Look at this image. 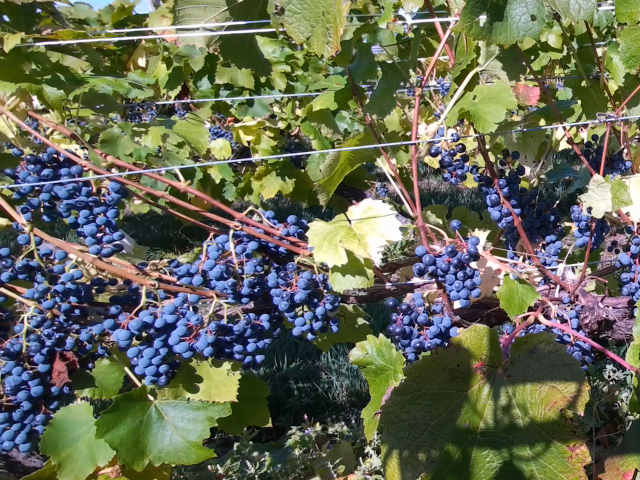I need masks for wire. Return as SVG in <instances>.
Masks as SVG:
<instances>
[{"instance_id":"obj_1","label":"wire","mask_w":640,"mask_h":480,"mask_svg":"<svg viewBox=\"0 0 640 480\" xmlns=\"http://www.w3.org/2000/svg\"><path fill=\"white\" fill-rule=\"evenodd\" d=\"M451 140L450 136L439 137V138H430V139H419V140H400V141H392L388 143L381 144H366V145H357V146H346L340 147L338 149H314L310 151H293L286 153H266V154H258V155H250L244 157L231 158L229 160H214V161H202V162H190V163H180V164H171L164 167L158 168H147V169H138L132 171H118L111 172L107 174H96V175H83L80 177H68V178H58L47 181H28L21 183H10V184H0V189H12V188H23V187H31V186H49L60 183H70V182H83L86 180H99V179H109L120 176H134L141 174H149V173H160L166 172L174 169H182V168H192V167H204V166H216V165H231L233 163L239 162H247L252 160H261L268 158H288L295 156H313L317 154H340L342 152L349 151H359V150H368V149H383L390 148L394 146H403V145H418V144H432V143H442L449 142Z\"/></svg>"},{"instance_id":"obj_2","label":"wire","mask_w":640,"mask_h":480,"mask_svg":"<svg viewBox=\"0 0 640 480\" xmlns=\"http://www.w3.org/2000/svg\"><path fill=\"white\" fill-rule=\"evenodd\" d=\"M277 31L276 27L272 28H249L243 30H229L220 32H206L199 31L193 33H176V34H162L156 36H120L113 38H89V39H77V40H37L33 42L18 43V48L35 47L39 45H79V44H91V43H115L122 41H159L164 39H178V38H195V37H222L231 35H246L252 33H274Z\"/></svg>"},{"instance_id":"obj_3","label":"wire","mask_w":640,"mask_h":480,"mask_svg":"<svg viewBox=\"0 0 640 480\" xmlns=\"http://www.w3.org/2000/svg\"><path fill=\"white\" fill-rule=\"evenodd\" d=\"M639 119H640L639 115H620V116H612V117H603V118L587 120V121H568L563 124H547V125H540V126L518 127L513 129H498L495 131H487V132H472V133L461 134L460 138L468 139V138H474V137H489V136H497L500 134L512 135L515 133L527 132V131L565 129L573 126H589V125H596V124H601L605 122H614V121H622V120H639Z\"/></svg>"},{"instance_id":"obj_4","label":"wire","mask_w":640,"mask_h":480,"mask_svg":"<svg viewBox=\"0 0 640 480\" xmlns=\"http://www.w3.org/2000/svg\"><path fill=\"white\" fill-rule=\"evenodd\" d=\"M270 19L258 20H227L222 22L201 23L195 25L145 26L135 28H114L109 30H93V35H111L116 33H137L147 31L198 30L203 28L224 27L230 25H261L269 24Z\"/></svg>"},{"instance_id":"obj_5","label":"wire","mask_w":640,"mask_h":480,"mask_svg":"<svg viewBox=\"0 0 640 480\" xmlns=\"http://www.w3.org/2000/svg\"><path fill=\"white\" fill-rule=\"evenodd\" d=\"M459 20L458 16L455 17H430V18H422V19H405L400 20L398 22L399 26L407 25V24H425V23H433V22H457Z\"/></svg>"},{"instance_id":"obj_6","label":"wire","mask_w":640,"mask_h":480,"mask_svg":"<svg viewBox=\"0 0 640 480\" xmlns=\"http://www.w3.org/2000/svg\"><path fill=\"white\" fill-rule=\"evenodd\" d=\"M435 282H436L435 278H415V279L402 280V281L377 282L375 284V287L379 288V287H390V286H404V285H411V284H417V283H435Z\"/></svg>"},{"instance_id":"obj_7","label":"wire","mask_w":640,"mask_h":480,"mask_svg":"<svg viewBox=\"0 0 640 480\" xmlns=\"http://www.w3.org/2000/svg\"><path fill=\"white\" fill-rule=\"evenodd\" d=\"M615 262H616L615 258L594 259V260L588 261L586 263V266L591 267L596 264H607V263H615Z\"/></svg>"}]
</instances>
